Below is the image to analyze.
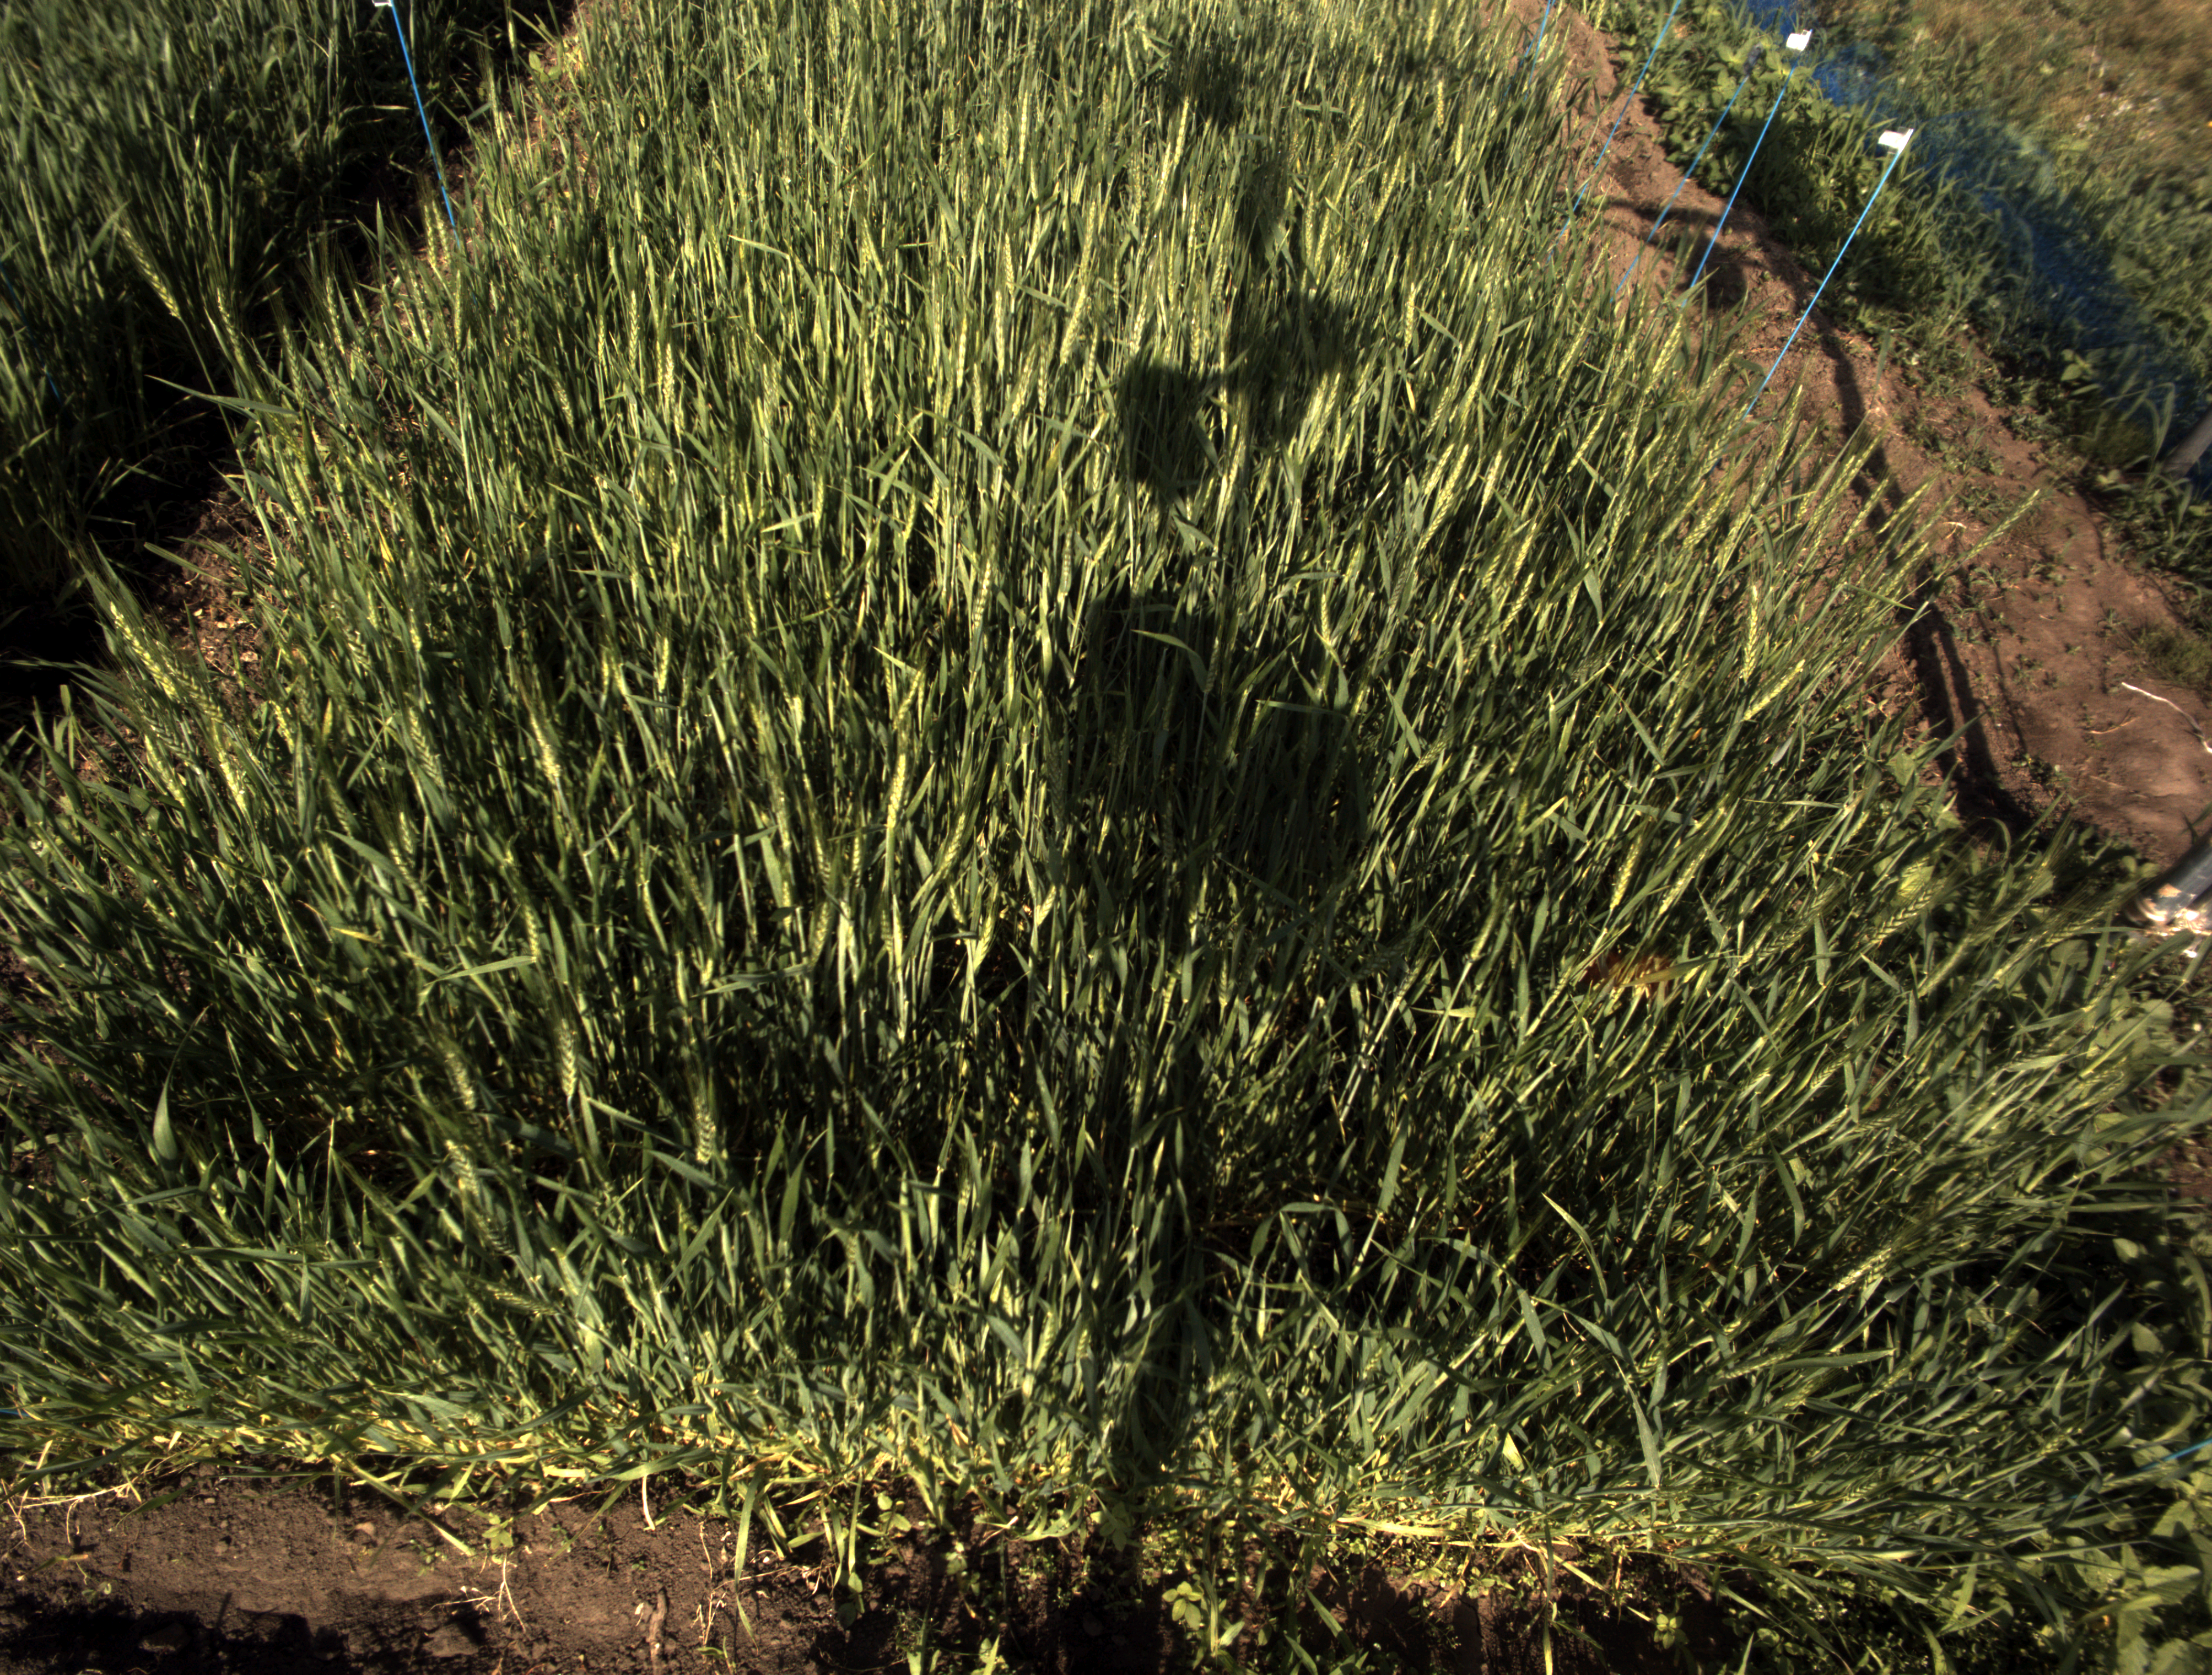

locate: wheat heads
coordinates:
[1201,476,1214,510]
[1554,0,1565,20]
[1230,437,1244,483]
[1350,95,1366,131]
[2085,1056,2127,1087]
[1633,292,1647,330]
[1283,185,1292,210]
[827,0,836,37]
[833,5,841,36]
[244,744,260,763]
[1041,89,1047,129]
[607,234,615,269]
[1413,18,1422,47]
[1355,40,1359,57]
[972,359,982,432]
[1036,884,1056,926]
[1216,262,1228,302]
[1404,279,1415,350]
[1916,936,1969,996]
[279,643,297,673]
[1504,40,1513,75]
[2028,912,2062,944]
[1572,114,1580,131]
[1644,332,1681,396]
[958,1176,971,1207]
[1396,0,1404,17]
[1161,323,1174,368]
[995,289,1005,378]
[1439,443,1469,509]
[277,1324,315,1346]
[1188,21,1197,41]
[1667,442,1684,475]
[1076,199,1096,285]
[1339,240,1348,277]
[1186,0,1194,26]
[1148,330,1160,369]
[1217,959,1229,1006]
[1447,0,1453,10]
[640,366,648,396]
[1364,1347,1382,1372]
[1665,652,1698,713]
[1651,314,1682,377]
[1598,242,1609,265]
[1601,100,1613,114]
[120,226,182,319]
[1273,1,1284,16]
[1035,92,1041,123]
[1741,1132,1767,1155]
[743,1329,762,1352]
[1351,930,1417,981]
[844,1233,859,1265]
[1371,29,1377,51]
[1860,609,1888,652]
[1265,384,1280,432]
[324,1267,348,1294]
[1281,0,1290,20]
[1843,1482,1876,1504]
[281,461,307,519]
[1345,120,1363,155]
[1131,165,1142,213]
[1047,739,1067,825]
[1658,847,1708,915]
[1163,969,1182,1007]
[1427,7,1437,45]
[1228,422,1237,452]
[1337,431,1352,464]
[1088,450,1100,512]
[889,0,899,25]
[1133,1078,1144,1117]
[1124,440,1132,476]
[552,379,575,428]
[485,1282,560,1316]
[1393,32,1401,54]
[1174,96,1189,165]
[1793,425,1816,467]
[809,413,819,456]
[1344,689,1364,739]
[1509,521,1537,583]
[436,151,451,198]
[1404,24,1413,50]
[920,332,926,368]
[587,509,606,553]
[1187,202,1197,254]
[1693,490,1736,544]
[1296,733,1310,774]
[1379,1,1389,27]
[695,1093,719,1165]
[640,886,652,922]
[1510,717,1537,771]
[108,1175,140,1216]
[1032,15,1039,59]
[1866,1367,1907,1398]
[1364,150,1374,174]
[784,129,792,177]
[850,835,862,875]
[507,19,516,49]
[1456,172,1470,207]
[1074,1330,1088,1358]
[730,442,736,483]
[1062,73,1069,107]
[283,1300,303,1323]
[1124,28,1136,81]
[745,268,755,303]
[404,500,416,527]
[1307,385,1325,428]
[1313,206,1329,267]
[294,674,320,727]
[748,701,762,733]
[947,1333,962,1365]
[1167,254,1174,302]
[629,288,639,369]
[741,1386,763,1407]
[840,73,857,138]
[1256,167,1275,216]
[316,1241,330,1262]
[1824,551,1859,601]
[431,507,442,538]
[1217,386,1229,428]
[432,198,454,264]
[1480,538,1508,590]
[2043,895,2120,950]
[520,902,542,957]
[754,127,761,160]
[1652,707,1681,768]
[1287,135,1299,160]
[400,557,417,610]
[793,692,804,736]
[1204,0,1211,15]
[1502,1,1510,17]
[883,665,895,705]
[1610,835,1641,910]
[1387,21,1397,41]
[947,364,955,407]
[949,883,972,944]
[332,680,358,720]
[1870,874,1947,945]
[1567,579,1584,607]
[767,1,778,35]
[860,221,871,264]
[1071,185,1081,203]
[1380,167,1389,188]
[1452,4,1469,45]
[1390,561,1412,606]
[1517,356,1524,385]
[1094,518,1118,564]
[1511,356,1521,386]
[1421,460,1430,494]
[1452,0,1465,21]
[1483,105,1497,142]
[1338,70,1346,85]
[1002,1282,1013,1316]
[1682,490,1726,549]
[2035,1434,2069,1456]
[940,810,965,876]
[780,879,793,928]
[1112,257,1121,312]
[439,309,461,372]
[467,1409,484,1425]
[1349,10,1357,43]
[1724,458,1772,549]
[1623,393,1644,458]
[2101,1474,2151,1491]
[1289,11,1300,34]
[282,324,306,409]
[1632,971,1645,1000]
[1566,408,1607,473]
[1013,342,1037,414]
[557,1017,579,1097]
[678,1197,698,1233]
[917,674,926,708]
[662,343,676,402]
[852,0,861,18]
[2090,1081,2122,1103]
[1355,71,1365,89]
[630,541,640,589]
[1825,630,1860,667]
[1736,1062,1772,1099]
[1002,111,1009,169]
[1110,64,1117,95]
[408,544,427,601]
[1546,30,1559,58]
[739,244,746,265]
[1811,500,1838,552]
[1767,1517,1822,1534]
[1204,636,1220,691]
[770,358,781,400]
[1720,1318,1742,1337]
[655,308,661,341]
[326,776,352,834]
[1445,149,1454,170]
[1029,169,1038,212]
[1552,359,1572,406]
[1607,480,1631,547]
[1016,90,1028,166]
[1520,140,1541,168]
[1822,1109,1849,1133]
[222,1227,248,1247]
[1613,975,1628,1000]
[1189,296,1200,368]
[978,237,984,257]
[1038,333,1048,412]
[1696,403,1748,479]
[530,712,546,744]
[1184,496,1193,525]
[658,636,670,690]
[1965,489,2040,559]
[597,314,606,364]
[409,704,443,785]
[1991,937,2034,979]
[456,269,464,352]
[1474,39,1491,58]
[1118,726,1128,764]
[1040,1314,1056,1352]
[821,858,831,886]
[1806,454,1856,525]
[1736,921,1773,969]
[217,285,249,366]
[1086,320,1099,383]
[1723,1354,1785,1379]
[541,742,556,786]
[1313,120,1322,158]
[2089,960,2130,1004]
[688,235,696,268]
[1840,477,1887,546]
[2002,1028,2066,1070]
[742,472,753,512]
[1279,118,1289,149]
[1142,24,1150,51]
[488,279,499,311]
[1216,713,1241,766]
[1329,758,1344,786]
[1491,315,1502,346]
[700,954,714,989]
[1373,39,1379,64]
[472,1209,517,1257]
[1481,450,1502,505]
[956,332,968,388]
[211,721,249,811]
[189,1253,207,1273]
[646,462,657,498]
[1015,420,1024,461]
[1855,527,1898,586]
[444,1048,478,1112]
[808,76,814,146]
[1161,800,1176,863]
[396,809,416,870]
[1969,853,2052,942]
[154,640,225,724]
[860,302,869,340]
[1552,73,1567,100]
[1328,253,1339,303]
[1882,1138,1913,1156]
[972,558,993,629]
[1027,870,1038,900]
[960,137,969,201]
[1877,480,1928,534]
[1485,266,1502,321]
[1084,0,1091,25]
[1015,304,1024,342]
[1309,371,1340,455]
[1854,1100,1910,1135]
[1836,436,1878,496]
[1108,2,1118,40]
[1661,253,1688,303]
[270,698,296,749]
[832,230,842,257]
[1420,493,1452,551]
[466,1291,484,1314]
[1317,673,1326,693]
[409,613,424,653]
[1300,267,1307,293]
[752,4,762,29]
[1448,403,1457,425]
[440,1137,481,1198]
[1837,596,1857,624]
[1845,811,1869,844]
[746,591,759,639]
[1303,202,1314,260]
[1103,87,1107,114]
[1004,231,1016,296]
[1612,317,1645,382]
[1776,808,1798,831]
[1283,65,1290,93]
[376,1251,397,1278]
[1519,397,1534,425]
[777,669,791,705]
[776,133,785,170]
[199,1157,229,1216]
[1593,0,1606,30]
[1211,1371,1231,1392]
[610,653,625,694]
[1377,43,1386,68]
[723,461,730,481]
[344,625,373,675]
[1549,966,1572,1002]
[1783,1383,1814,1410]
[872,288,884,334]
[973,914,994,967]
[727,130,747,198]
[1093,672,1101,713]
[408,265,432,342]
[808,902,829,968]
[143,895,172,928]
[1622,444,1636,480]
[1484,225,1512,285]
[1031,206,1040,248]
[814,837,825,873]
[1061,284,1087,364]
[1774,384,1802,460]
[687,869,707,911]
[1466,617,1490,668]
[774,808,791,841]
[1006,638,1013,679]
[710,223,722,267]
[1435,79,1445,129]
[423,203,437,268]
[670,383,678,414]
[673,412,681,439]
[1740,582,1759,680]
[762,360,774,427]
[1332,404,1342,452]
[1314,169,1330,196]
[1062,530,1073,578]
[1345,542,1359,579]
[1809,1051,1851,1090]
[1373,155,1400,223]
[1883,541,1927,598]
[1624,531,1647,573]
[1253,701,1261,728]
[1694,348,1735,403]
[1508,1319,1524,1337]
[1569,641,1612,684]
[1455,154,1470,178]
[784,1342,797,1362]
[325,272,345,353]
[1517,796,1528,825]
[790,309,795,330]
[1355,3,1368,33]
[643,1259,660,1300]
[835,393,844,428]
[1106,109,1113,136]
[1136,2,1143,29]
[1351,362,1371,406]
[1098,198,1108,224]
[1252,378,1261,421]
[931,473,939,511]
[1162,685,1176,731]
[387,838,431,909]
[1798,881,1836,921]
[254,388,310,465]
[1753,917,1810,963]
[1391,965,1421,1008]
[345,453,398,515]
[508,513,517,548]
[886,752,906,828]
[1626,1347,1662,1385]
[679,406,685,429]
[938,8,943,26]
[545,523,553,546]
[143,732,188,808]
[1999,1328,2018,1349]
[904,492,917,540]
[1204,117,1212,133]
[933,300,940,360]
[489,67,502,136]
[894,670,921,729]
[1348,93,1359,114]
[1334,157,1353,204]
[1253,455,1271,509]
[1657,481,1707,543]
[1900,853,1930,879]
[559,1255,582,1300]
[1142,210,1151,247]
[685,209,692,237]
[1557,309,1589,374]
[1749,671,1778,705]
[1462,353,1486,412]
[1128,292,1148,369]
[1110,732,1119,769]
[1424,444,1456,491]
[1558,21,1570,59]
[1209,16,1216,36]
[654,338,664,386]
[1485,0,1502,45]
[941,486,949,526]
[1461,319,1478,363]
[878,908,894,954]
[133,693,206,776]
[827,34,835,65]
[1894,492,1953,560]
[1454,122,1464,166]
[1150,502,1160,534]
[1861,1242,1893,1293]
[601,661,610,697]
[1320,593,1331,644]
[367,589,379,630]
[1325,140,1340,170]
[1102,111,1108,132]
[1471,917,1495,958]
[354,286,372,327]
[563,51,575,85]
[347,340,369,367]
[332,464,351,514]
[1646,416,1689,482]
[1047,316,1057,364]
[1502,573,1534,632]
[1210,243,1224,295]
[1829,1247,1891,1292]
[1792,491,1813,528]
[863,338,875,420]
[1327,29,1338,49]
[1523,71,1531,94]
[813,475,825,527]
[1413,741,1448,771]
[1420,385,1448,443]
[1691,417,1713,465]
[866,232,884,277]
[110,599,181,701]
[1328,3,1338,36]
[1242,942,1260,987]
[550,492,556,511]
[1129,565,1143,605]
[1404,81,1413,100]
[1471,0,1477,7]
[1176,25,1185,40]
[318,339,338,394]
[941,212,949,247]
[1158,141,1172,190]
[515,317,522,346]
[730,333,741,374]
[1741,657,1806,720]
[486,561,498,586]
[1399,150,1408,182]
[1657,1021,1681,1057]
[1304,43,1318,90]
